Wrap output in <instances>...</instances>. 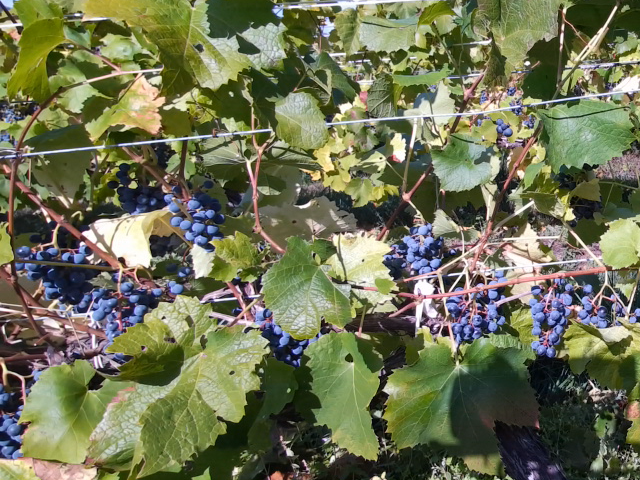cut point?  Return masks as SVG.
<instances>
[{
	"label": "cut point",
	"instance_id": "1",
	"mask_svg": "<svg viewBox=\"0 0 640 480\" xmlns=\"http://www.w3.org/2000/svg\"><path fill=\"white\" fill-rule=\"evenodd\" d=\"M604 279H605V280H604V283H603V285L599 288V290H598V292H597V295H596V298H599V297H600V295H601L602 291H603L605 288L609 289V290H610V292H611L614 296H617V292H616V291H615V290H614V289L609 285V283H608V271H606V272L604 273Z\"/></svg>",
	"mask_w": 640,
	"mask_h": 480
},
{
	"label": "cut point",
	"instance_id": "2",
	"mask_svg": "<svg viewBox=\"0 0 640 480\" xmlns=\"http://www.w3.org/2000/svg\"><path fill=\"white\" fill-rule=\"evenodd\" d=\"M0 365L2 366L1 378H2L3 384L7 385V381H8L7 374H12L13 376H16V372L15 371H7V367H6V364H5L4 360H3V358H0Z\"/></svg>",
	"mask_w": 640,
	"mask_h": 480
},
{
	"label": "cut point",
	"instance_id": "3",
	"mask_svg": "<svg viewBox=\"0 0 640 480\" xmlns=\"http://www.w3.org/2000/svg\"><path fill=\"white\" fill-rule=\"evenodd\" d=\"M119 262H120V271H119L120 275H119L118 286L121 285L120 278L122 277L123 271H126V270H137V269L140 268V265H136L134 267H125V268H123V263L121 261H119Z\"/></svg>",
	"mask_w": 640,
	"mask_h": 480
}]
</instances>
